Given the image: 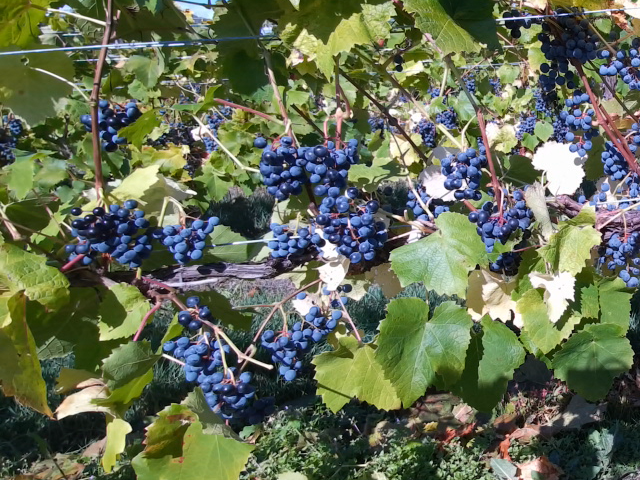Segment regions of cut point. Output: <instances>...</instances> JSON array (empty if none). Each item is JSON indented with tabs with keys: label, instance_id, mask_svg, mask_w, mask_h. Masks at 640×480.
<instances>
[{
	"label": "cut point",
	"instance_id": "cut-point-1",
	"mask_svg": "<svg viewBox=\"0 0 640 480\" xmlns=\"http://www.w3.org/2000/svg\"><path fill=\"white\" fill-rule=\"evenodd\" d=\"M99 195H100V199L97 202V206H103V203H104L105 210H109V200L105 197L102 187H100L99 189Z\"/></svg>",
	"mask_w": 640,
	"mask_h": 480
},
{
	"label": "cut point",
	"instance_id": "cut-point-2",
	"mask_svg": "<svg viewBox=\"0 0 640 480\" xmlns=\"http://www.w3.org/2000/svg\"><path fill=\"white\" fill-rule=\"evenodd\" d=\"M214 334H215V337H216V339L218 341V345H219V348H220L222 363L226 364V361H225L226 353H225V350L223 349V346L221 345V339H220L219 335H217L215 332H214Z\"/></svg>",
	"mask_w": 640,
	"mask_h": 480
},
{
	"label": "cut point",
	"instance_id": "cut-point-3",
	"mask_svg": "<svg viewBox=\"0 0 640 480\" xmlns=\"http://www.w3.org/2000/svg\"><path fill=\"white\" fill-rule=\"evenodd\" d=\"M474 118H477L476 114L472 115L470 119L466 122L465 126L461 129V142H464V132L466 131V129H468L469 125L472 123Z\"/></svg>",
	"mask_w": 640,
	"mask_h": 480
},
{
	"label": "cut point",
	"instance_id": "cut-point-4",
	"mask_svg": "<svg viewBox=\"0 0 640 480\" xmlns=\"http://www.w3.org/2000/svg\"><path fill=\"white\" fill-rule=\"evenodd\" d=\"M310 205H306V207H303L300 209V211L297 213L296 215V220H295V228H298V222H299V217L301 216V214L305 211L309 209Z\"/></svg>",
	"mask_w": 640,
	"mask_h": 480
},
{
	"label": "cut point",
	"instance_id": "cut-point-5",
	"mask_svg": "<svg viewBox=\"0 0 640 480\" xmlns=\"http://www.w3.org/2000/svg\"><path fill=\"white\" fill-rule=\"evenodd\" d=\"M169 202H172L173 204H175L177 206V208L179 209V211L181 212V214H184V210L182 208V206L180 205V203H178V201H175L174 199L168 198Z\"/></svg>",
	"mask_w": 640,
	"mask_h": 480
}]
</instances>
